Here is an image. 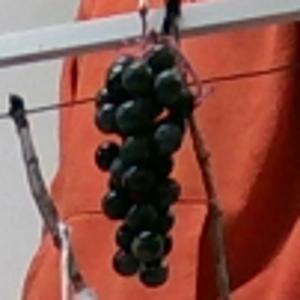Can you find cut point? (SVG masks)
<instances>
[{"mask_svg": "<svg viewBox=\"0 0 300 300\" xmlns=\"http://www.w3.org/2000/svg\"><path fill=\"white\" fill-rule=\"evenodd\" d=\"M151 6V0H139L137 6H136V12L138 14V17L141 21V49L140 52H144L147 50L148 44L146 41V31L148 28L147 24V17H149L150 14V7Z\"/></svg>", "mask_w": 300, "mask_h": 300, "instance_id": "1", "label": "cut point"}]
</instances>
